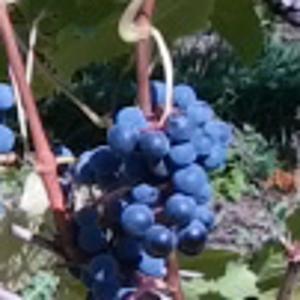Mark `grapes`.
Instances as JSON below:
<instances>
[{"mask_svg": "<svg viewBox=\"0 0 300 300\" xmlns=\"http://www.w3.org/2000/svg\"><path fill=\"white\" fill-rule=\"evenodd\" d=\"M77 242L82 253L88 258V273L85 282L89 285L92 300H113L120 291L119 279L122 276V265L119 259L102 252V235L96 226L97 214L88 207L82 206L76 212Z\"/></svg>", "mask_w": 300, "mask_h": 300, "instance_id": "b958b902", "label": "grapes"}, {"mask_svg": "<svg viewBox=\"0 0 300 300\" xmlns=\"http://www.w3.org/2000/svg\"><path fill=\"white\" fill-rule=\"evenodd\" d=\"M154 115L135 105L112 114L107 145L78 156L70 175L79 183L101 181L112 189L125 186L118 203L119 251L149 279L166 275L175 248L196 257L207 244L213 212L204 205L212 196V170L228 158L232 126L214 117V108L187 83L173 87L165 103V81L150 80Z\"/></svg>", "mask_w": 300, "mask_h": 300, "instance_id": "01657485", "label": "grapes"}, {"mask_svg": "<svg viewBox=\"0 0 300 300\" xmlns=\"http://www.w3.org/2000/svg\"><path fill=\"white\" fill-rule=\"evenodd\" d=\"M53 153L56 157L60 159H69L73 155V150L69 145L64 143H59L54 146Z\"/></svg>", "mask_w": 300, "mask_h": 300, "instance_id": "84f90ec7", "label": "grapes"}, {"mask_svg": "<svg viewBox=\"0 0 300 300\" xmlns=\"http://www.w3.org/2000/svg\"><path fill=\"white\" fill-rule=\"evenodd\" d=\"M15 104V93L13 88L6 84L0 83V112H9Z\"/></svg>", "mask_w": 300, "mask_h": 300, "instance_id": "0513c4c2", "label": "grapes"}]
</instances>
